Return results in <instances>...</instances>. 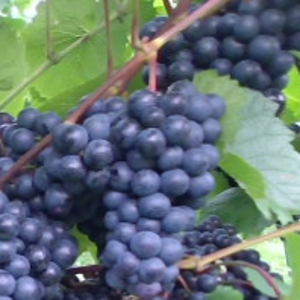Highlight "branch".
<instances>
[{
	"label": "branch",
	"mask_w": 300,
	"mask_h": 300,
	"mask_svg": "<svg viewBox=\"0 0 300 300\" xmlns=\"http://www.w3.org/2000/svg\"><path fill=\"white\" fill-rule=\"evenodd\" d=\"M54 138V135L50 133L43 138L38 144H36L30 151L26 152L21 158L12 165L9 173L5 177H0V185H3L14 173H16L25 163L36 157L39 152L45 149L50 140Z\"/></svg>",
	"instance_id": "branch-3"
},
{
	"label": "branch",
	"mask_w": 300,
	"mask_h": 300,
	"mask_svg": "<svg viewBox=\"0 0 300 300\" xmlns=\"http://www.w3.org/2000/svg\"><path fill=\"white\" fill-rule=\"evenodd\" d=\"M297 229H300V222L290 224V225H288L286 227H283V228H279V229H277L273 232H270V233L265 234L263 236L257 237L255 239L247 241L245 243H241V244L231 246L227 249L221 250V251L216 252L212 255H208V256H205V257H203L202 255H198L195 258V260L189 261V262L179 261L178 265H179L180 268L198 267L200 265L217 261V260L222 259L226 256H229V255H232V254H235V253H239V252L244 251V250L259 247L263 243H266L271 239H274L278 236H281L283 234H286L288 232H291V231L297 230Z\"/></svg>",
	"instance_id": "branch-2"
},
{
	"label": "branch",
	"mask_w": 300,
	"mask_h": 300,
	"mask_svg": "<svg viewBox=\"0 0 300 300\" xmlns=\"http://www.w3.org/2000/svg\"><path fill=\"white\" fill-rule=\"evenodd\" d=\"M222 2L223 0H208L203 6L186 16L189 7L188 0H181L179 8L173 6L169 0H164L167 8L176 13V15L174 16L170 25L166 27L151 44L147 45L139 40L140 2L135 0L133 2L132 43L140 52L125 65L118 68L113 75L95 92V94L76 111L73 117L70 118V121L77 122L90 107L101 100L104 96H111L121 92L126 86L129 77L139 72L140 66L143 64L144 60L148 58V54L150 52L158 54L159 48L165 45L171 37L184 29L188 24L200 17L207 10L220 5Z\"/></svg>",
	"instance_id": "branch-1"
}]
</instances>
